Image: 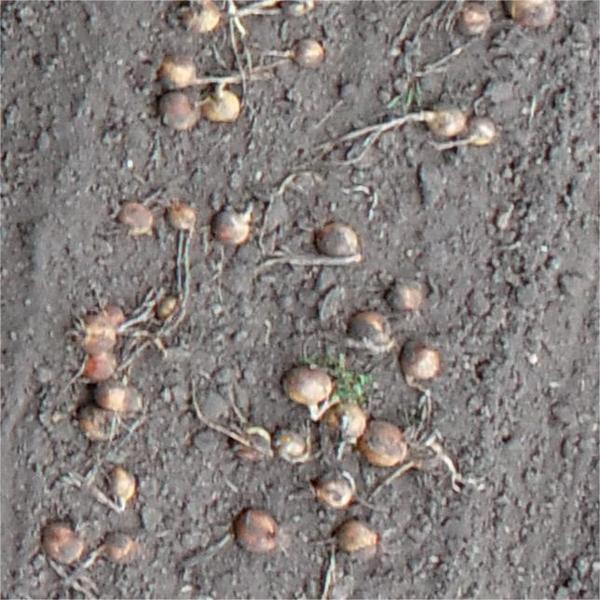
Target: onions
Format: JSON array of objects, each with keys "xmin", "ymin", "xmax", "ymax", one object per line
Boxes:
[
  {"xmin": 209, "ymin": 207, "xmax": 247, "ymax": 243},
  {"xmin": 160, "ymin": 92, "xmax": 197, "ymax": 130},
  {"xmin": 291, "ymin": 37, "xmax": 323, "ymax": 67},
  {"xmin": 77, "ymin": 404, "xmax": 115, "ymax": 441},
  {"xmin": 107, "ymin": 468, "xmax": 135, "ymax": 502},
  {"xmin": 96, "ymin": 531, "xmax": 144, "ymax": 566},
  {"xmin": 152, "ymin": 293, "xmax": 177, "ymax": 320},
  {"xmin": 335, "ymin": 519, "xmax": 374, "ymax": 556},
  {"xmin": 284, "ymin": 365, "xmax": 329, "ymax": 408},
  {"xmin": 389, "ymin": 276, "xmax": 424, "ymax": 310},
  {"xmin": 167, "ymin": 202, "xmax": 195, "ymax": 229},
  {"xmin": 236, "ymin": 425, "xmax": 270, "ymax": 460},
  {"xmin": 327, "ymin": 401, "xmax": 365, "ymax": 440},
  {"xmin": 203, "ymin": 91, "xmax": 240, "ymax": 121},
  {"xmin": 97, "ymin": 380, "xmax": 136, "ymax": 414},
  {"xmin": 160, "ymin": 54, "xmax": 196, "ymax": 89},
  {"xmin": 186, "ymin": 3, "xmax": 223, "ymax": 35},
  {"xmin": 82, "ymin": 349, "xmax": 112, "ymax": 381},
  {"xmin": 464, "ymin": 118, "xmax": 492, "ymax": 147},
  {"xmin": 100, "ymin": 306, "xmax": 125, "ymax": 327},
  {"xmin": 428, "ymin": 104, "xmax": 464, "ymax": 138},
  {"xmin": 399, "ymin": 344, "xmax": 440, "ymax": 382},
  {"xmin": 349, "ymin": 309, "xmax": 391, "ymax": 353},
  {"xmin": 359, "ymin": 420, "xmax": 405, "ymax": 467},
  {"xmin": 278, "ymin": 0, "xmax": 312, "ymax": 18},
  {"xmin": 117, "ymin": 202, "xmax": 151, "ymax": 236},
  {"xmin": 77, "ymin": 318, "xmax": 116, "ymax": 355},
  {"xmin": 275, "ymin": 429, "xmax": 307, "ymax": 459},
  {"xmin": 314, "ymin": 472, "xmax": 352, "ymax": 509},
  {"xmin": 316, "ymin": 220, "xmax": 358, "ymax": 258},
  {"xmin": 460, "ymin": 4, "xmax": 491, "ymax": 37},
  {"xmin": 509, "ymin": 0, "xmax": 554, "ymax": 29},
  {"xmin": 233, "ymin": 507, "xmax": 277, "ymax": 552},
  {"xmin": 42, "ymin": 522, "xmax": 83, "ymax": 566}
]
